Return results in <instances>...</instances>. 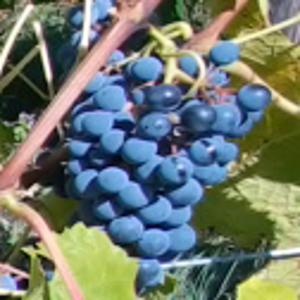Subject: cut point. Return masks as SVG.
Here are the masks:
<instances>
[{"label": "cut point", "instance_id": "1", "mask_svg": "<svg viewBox=\"0 0 300 300\" xmlns=\"http://www.w3.org/2000/svg\"><path fill=\"white\" fill-rule=\"evenodd\" d=\"M143 29L151 36L147 44L143 46L144 52L152 53L159 43L167 47V66L163 82L170 84L174 76L179 81L185 80L186 73L176 65V42L173 39L182 35V39L186 41L196 31L185 20L166 22L158 30L152 22H149Z\"/></svg>", "mask_w": 300, "mask_h": 300}]
</instances>
